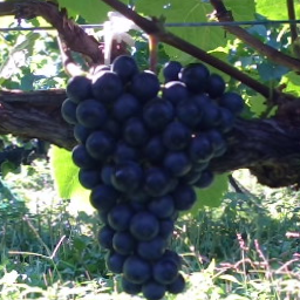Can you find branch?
<instances>
[{"label":"branch","instance_id":"1","mask_svg":"<svg viewBox=\"0 0 300 300\" xmlns=\"http://www.w3.org/2000/svg\"><path fill=\"white\" fill-rule=\"evenodd\" d=\"M112 8H115L125 18L133 22L137 27L147 32L149 35L155 36L157 40L170 44L182 50L188 55L199 59L204 64L215 67L224 75L232 76L236 81L252 88L253 90L265 96L266 106L258 114V121L265 123L272 115L274 110L280 105L293 107L299 102V97L292 92H285V86L278 84L275 89L268 87L266 84L254 79L249 73L238 69L221 58H215L205 51L189 44L185 39L179 38L175 34L169 33L164 29V21L162 19L153 18L151 21L144 16L136 13L127 7L121 0H101Z\"/></svg>","mask_w":300,"mask_h":300},{"label":"branch","instance_id":"2","mask_svg":"<svg viewBox=\"0 0 300 300\" xmlns=\"http://www.w3.org/2000/svg\"><path fill=\"white\" fill-rule=\"evenodd\" d=\"M226 29H228V31L239 41H242L249 46H253L255 49L264 52L268 57H271L288 67L300 70V60L276 50L265 41L257 40L254 36L248 34L240 27H226Z\"/></svg>","mask_w":300,"mask_h":300},{"label":"branch","instance_id":"3","mask_svg":"<svg viewBox=\"0 0 300 300\" xmlns=\"http://www.w3.org/2000/svg\"><path fill=\"white\" fill-rule=\"evenodd\" d=\"M212 3L215 5L216 19L219 22L233 21L232 14L229 10H226V5L223 3V0H212Z\"/></svg>","mask_w":300,"mask_h":300}]
</instances>
